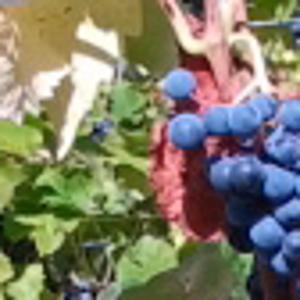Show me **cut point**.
<instances>
[{"label":"cut point","mask_w":300,"mask_h":300,"mask_svg":"<svg viewBox=\"0 0 300 300\" xmlns=\"http://www.w3.org/2000/svg\"><path fill=\"white\" fill-rule=\"evenodd\" d=\"M225 40L227 42H246L251 47L255 66L254 77L257 81H263L265 74L260 42L251 33H227Z\"/></svg>","instance_id":"cut-point-1"}]
</instances>
